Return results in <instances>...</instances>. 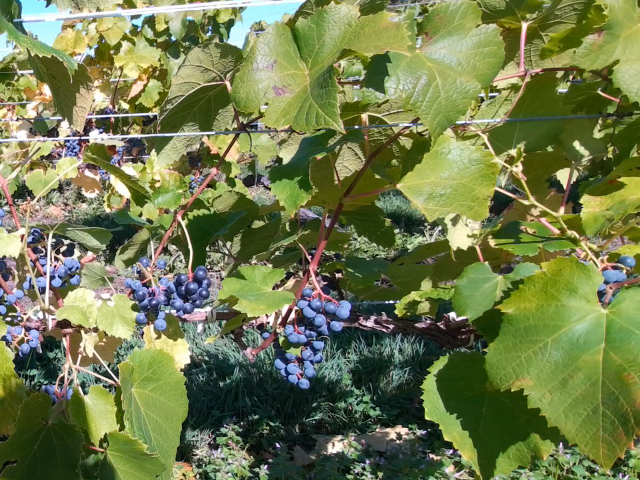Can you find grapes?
Here are the masks:
<instances>
[{"mask_svg":"<svg viewBox=\"0 0 640 480\" xmlns=\"http://www.w3.org/2000/svg\"><path fill=\"white\" fill-rule=\"evenodd\" d=\"M603 282H601L597 288V300L604 302L606 300V292L609 289V285L615 283H626L628 276L622 269H608L602 272Z\"/></svg>","mask_w":640,"mask_h":480,"instance_id":"grapes-4","label":"grapes"},{"mask_svg":"<svg viewBox=\"0 0 640 480\" xmlns=\"http://www.w3.org/2000/svg\"><path fill=\"white\" fill-rule=\"evenodd\" d=\"M25 296V292L22 289H15L13 291V295L12 296H6L5 297V303L7 305H12L14 303H16L17 301H20V299H22Z\"/></svg>","mask_w":640,"mask_h":480,"instance_id":"grapes-8","label":"grapes"},{"mask_svg":"<svg viewBox=\"0 0 640 480\" xmlns=\"http://www.w3.org/2000/svg\"><path fill=\"white\" fill-rule=\"evenodd\" d=\"M34 283H36L38 293L43 295L47 290V278L45 276H38L33 280L30 275H27L21 287L24 290H30L34 286Z\"/></svg>","mask_w":640,"mask_h":480,"instance_id":"grapes-6","label":"grapes"},{"mask_svg":"<svg viewBox=\"0 0 640 480\" xmlns=\"http://www.w3.org/2000/svg\"><path fill=\"white\" fill-rule=\"evenodd\" d=\"M313 290L305 288L301 298L296 301L297 308L302 311L303 316L296 318L298 324H287L283 328V332L287 335V341L293 344H304L308 346L301 352V364L303 365L304 375L306 377H316L318 372L314 368V364L323 361L321 352L326 343L323 340H313L320 334L329 336L332 332L339 333L344 329V325L340 320H349L353 306L345 299H340L336 304L333 301L323 302L321 299H312ZM273 348L276 350L274 360V368L284 377L290 384L297 385L302 390H308L311 387V381L306 377L297 375L299 366L294 363L298 360L296 354L284 352V349L275 343Z\"/></svg>","mask_w":640,"mask_h":480,"instance_id":"grapes-1","label":"grapes"},{"mask_svg":"<svg viewBox=\"0 0 640 480\" xmlns=\"http://www.w3.org/2000/svg\"><path fill=\"white\" fill-rule=\"evenodd\" d=\"M160 287L152 288L148 283L140 280L126 279L124 287L132 290L133 297L139 302V312L135 317L137 324H146L148 316L144 312L150 311L155 314L156 320L153 328L157 332L167 330L166 313L161 310V305L171 306L177 310L179 316L192 314L194 307H201L203 300L211 297L212 279L208 277V269L204 265H197L194 269L192 281L185 272H180L175 276V281H170L168 277L158 280Z\"/></svg>","mask_w":640,"mask_h":480,"instance_id":"grapes-2","label":"grapes"},{"mask_svg":"<svg viewBox=\"0 0 640 480\" xmlns=\"http://www.w3.org/2000/svg\"><path fill=\"white\" fill-rule=\"evenodd\" d=\"M25 333L28 335L29 339L27 342H24L19 346V352L21 354H29L31 349H36L39 344V331L36 327L29 326L25 329Z\"/></svg>","mask_w":640,"mask_h":480,"instance_id":"grapes-5","label":"grapes"},{"mask_svg":"<svg viewBox=\"0 0 640 480\" xmlns=\"http://www.w3.org/2000/svg\"><path fill=\"white\" fill-rule=\"evenodd\" d=\"M76 244L70 242L67 245V249L62 252V256L66 258L58 268L51 267L49 269L50 284L52 287L59 289L66 288L68 283L73 286H78L81 283V277L78 274H74L81 268V262L72 257L75 254Z\"/></svg>","mask_w":640,"mask_h":480,"instance_id":"grapes-3","label":"grapes"},{"mask_svg":"<svg viewBox=\"0 0 640 480\" xmlns=\"http://www.w3.org/2000/svg\"><path fill=\"white\" fill-rule=\"evenodd\" d=\"M15 335L21 336L23 334V327L21 325L13 326L9 325L6 328V335L4 336V340L7 343H12L15 340Z\"/></svg>","mask_w":640,"mask_h":480,"instance_id":"grapes-7","label":"grapes"},{"mask_svg":"<svg viewBox=\"0 0 640 480\" xmlns=\"http://www.w3.org/2000/svg\"><path fill=\"white\" fill-rule=\"evenodd\" d=\"M31 251L33 254H38L40 255L38 257L39 262L42 265V269L45 271V273L48 271V266H47V257L45 255H41L43 253V250L40 247L37 246H33L31 248Z\"/></svg>","mask_w":640,"mask_h":480,"instance_id":"grapes-9","label":"grapes"},{"mask_svg":"<svg viewBox=\"0 0 640 480\" xmlns=\"http://www.w3.org/2000/svg\"><path fill=\"white\" fill-rule=\"evenodd\" d=\"M57 390H58V392H59V393H61V394H60V397H61V398H64V397H65V399H66V400H70V399H71V396H72V395H73V393H74V390L72 389V387H71V386H68V387L66 388V390H65L66 395H65L64 393H62V392H63V387H62V386H58V387H57Z\"/></svg>","mask_w":640,"mask_h":480,"instance_id":"grapes-10","label":"grapes"}]
</instances>
